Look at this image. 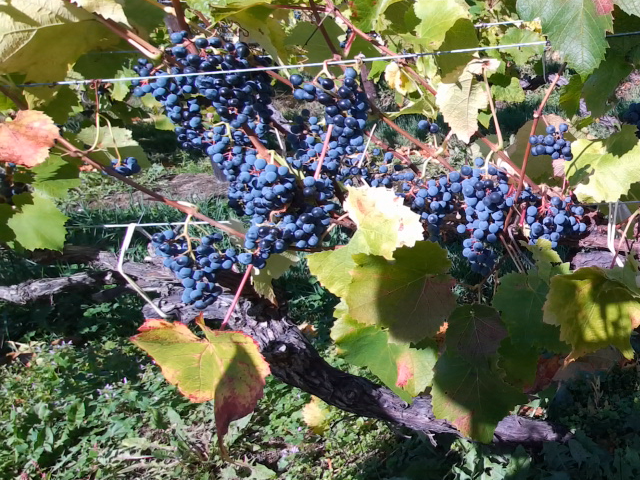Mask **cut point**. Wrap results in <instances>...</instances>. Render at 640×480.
Here are the masks:
<instances>
[{"instance_id":"cut-point-1","label":"cut point","mask_w":640,"mask_h":480,"mask_svg":"<svg viewBox=\"0 0 640 480\" xmlns=\"http://www.w3.org/2000/svg\"><path fill=\"white\" fill-rule=\"evenodd\" d=\"M334 60H335V59H334L333 57H324V58L321 60V69H319V70L317 71V75H318V76H321V75L324 73L326 76H329V75H330V71H329V70L327 69V67H326V62L334 61Z\"/></svg>"},{"instance_id":"cut-point-2","label":"cut point","mask_w":640,"mask_h":480,"mask_svg":"<svg viewBox=\"0 0 640 480\" xmlns=\"http://www.w3.org/2000/svg\"><path fill=\"white\" fill-rule=\"evenodd\" d=\"M191 218H192V216H190V215H186V217H185L186 224L184 225L183 237H184L186 240H189V239H190V236L188 235V234H189V224H188V221H189V220H191Z\"/></svg>"},{"instance_id":"cut-point-3","label":"cut point","mask_w":640,"mask_h":480,"mask_svg":"<svg viewBox=\"0 0 640 480\" xmlns=\"http://www.w3.org/2000/svg\"><path fill=\"white\" fill-rule=\"evenodd\" d=\"M493 155H494V151H493V150L491 149V147H490V148H489V152H488V154H487V156H486V158H485V162H486V163H489V162L491 161V159H492Z\"/></svg>"}]
</instances>
